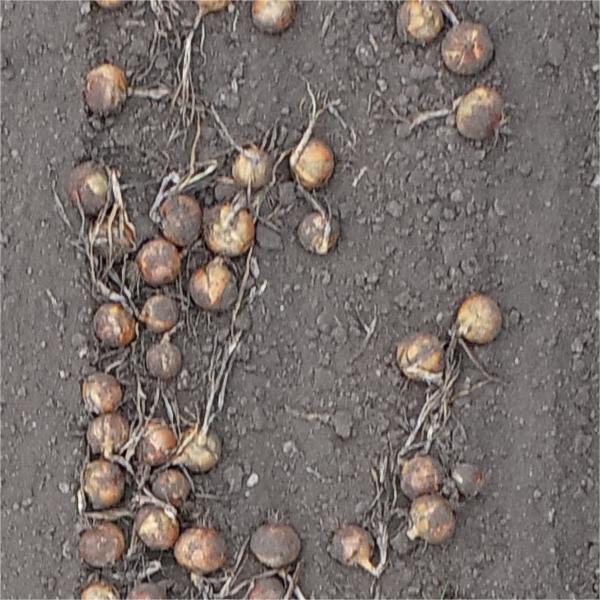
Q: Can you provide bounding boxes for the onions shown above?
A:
[91,302,135,345]
[158,195,201,244]
[82,458,125,505]
[296,210,338,251]
[77,577,118,599]
[332,524,376,572]
[151,466,190,504]
[139,293,177,331]
[82,64,128,112]
[143,341,181,378]
[406,494,456,542]
[203,205,251,251]
[79,522,124,564]
[186,261,233,308]
[290,137,334,185]
[442,21,492,72]
[89,205,134,257]
[92,0,124,10]
[231,147,269,185]
[451,86,503,138]
[125,578,162,599]
[86,414,126,449]
[82,373,122,412]
[135,504,178,547]
[251,522,298,568]
[396,330,440,381]
[175,526,224,572]
[449,460,483,495]
[66,163,111,216]
[194,0,229,15]
[456,295,500,342]
[251,0,293,33]
[139,421,177,462]
[402,455,439,495]
[176,427,217,472]
[237,573,286,598]
[399,2,445,42]
[135,239,179,284]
